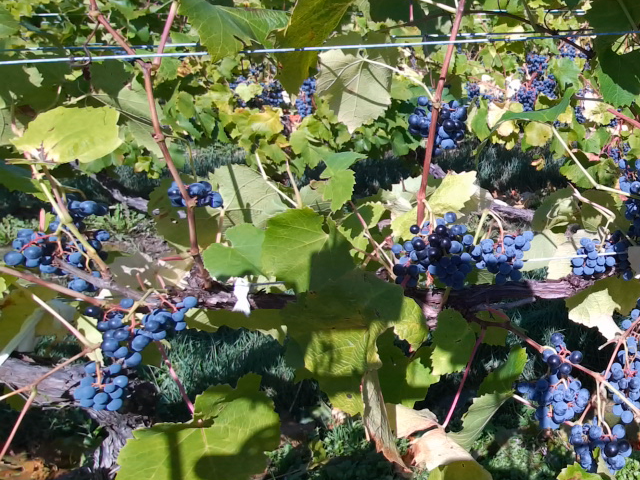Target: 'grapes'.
Masks as SVG:
<instances>
[{
  "instance_id": "18",
  "label": "grapes",
  "mask_w": 640,
  "mask_h": 480,
  "mask_svg": "<svg viewBox=\"0 0 640 480\" xmlns=\"http://www.w3.org/2000/svg\"><path fill=\"white\" fill-rule=\"evenodd\" d=\"M63 259L66 263H70L78 267L83 266V263L81 262L82 253L80 251H72L68 255H64Z\"/></svg>"
},
{
  "instance_id": "3",
  "label": "grapes",
  "mask_w": 640,
  "mask_h": 480,
  "mask_svg": "<svg viewBox=\"0 0 640 480\" xmlns=\"http://www.w3.org/2000/svg\"><path fill=\"white\" fill-rule=\"evenodd\" d=\"M542 361L551 367L550 374L534 384L519 383L517 391L527 393L529 400L542 404L534 414L539 427L557 431L564 422L572 421L575 414H580L587 408L591 394L586 387L581 388L582 381L578 378H572L567 388L563 383H559L557 388L552 387L563 375L568 376L572 367L562 363L553 353L543 352Z\"/></svg>"
},
{
  "instance_id": "9",
  "label": "grapes",
  "mask_w": 640,
  "mask_h": 480,
  "mask_svg": "<svg viewBox=\"0 0 640 480\" xmlns=\"http://www.w3.org/2000/svg\"><path fill=\"white\" fill-rule=\"evenodd\" d=\"M579 244L582 246L577 250V253H586V258L571 259L573 266V273L579 275H591L593 272H603L607 267L617 266H629V257L625 254H617L608 257H599L596 247L600 245L599 240L582 237L579 239Z\"/></svg>"
},
{
  "instance_id": "14",
  "label": "grapes",
  "mask_w": 640,
  "mask_h": 480,
  "mask_svg": "<svg viewBox=\"0 0 640 480\" xmlns=\"http://www.w3.org/2000/svg\"><path fill=\"white\" fill-rule=\"evenodd\" d=\"M627 210L625 211V218L628 221H633V235L640 237V201L638 199H630L625 202Z\"/></svg>"
},
{
  "instance_id": "4",
  "label": "grapes",
  "mask_w": 640,
  "mask_h": 480,
  "mask_svg": "<svg viewBox=\"0 0 640 480\" xmlns=\"http://www.w3.org/2000/svg\"><path fill=\"white\" fill-rule=\"evenodd\" d=\"M612 401L616 403L612 407V414L621 417L623 424H614L611 435L615 437L612 441L609 437L602 438L603 428L598 426L597 418L591 419V425L584 423L582 426L575 424L570 429L568 443L574 446V453L580 456V466L587 473L597 471V463L594 460L592 451L600 447L601 458L606 462L608 470L615 474L626 466V459L633 454V445L623 439L626 436V426H631L634 421L633 409L616 393L611 395Z\"/></svg>"
},
{
  "instance_id": "8",
  "label": "grapes",
  "mask_w": 640,
  "mask_h": 480,
  "mask_svg": "<svg viewBox=\"0 0 640 480\" xmlns=\"http://www.w3.org/2000/svg\"><path fill=\"white\" fill-rule=\"evenodd\" d=\"M441 122L437 123L434 145L441 146L446 150L457 149L455 143L461 141L465 135V126L462 121L467 119L465 107H460V102L451 100L449 103L441 104Z\"/></svg>"
},
{
  "instance_id": "12",
  "label": "grapes",
  "mask_w": 640,
  "mask_h": 480,
  "mask_svg": "<svg viewBox=\"0 0 640 480\" xmlns=\"http://www.w3.org/2000/svg\"><path fill=\"white\" fill-rule=\"evenodd\" d=\"M191 197H197V206L202 208L209 205L212 209H219L223 206V196L212 191V185L206 180H200L188 184Z\"/></svg>"
},
{
  "instance_id": "5",
  "label": "grapes",
  "mask_w": 640,
  "mask_h": 480,
  "mask_svg": "<svg viewBox=\"0 0 640 480\" xmlns=\"http://www.w3.org/2000/svg\"><path fill=\"white\" fill-rule=\"evenodd\" d=\"M96 367V362H88L84 366L86 377L80 380L78 387L70 390L71 396L84 410L92 408L93 411L105 410L106 413L120 410L123 407V400L120 397L123 395V388L129 384V378L125 375L103 378L101 383L105 387L102 388L103 392L97 393L99 388L92 387V384L98 382V378L92 375L97 373Z\"/></svg>"
},
{
  "instance_id": "7",
  "label": "grapes",
  "mask_w": 640,
  "mask_h": 480,
  "mask_svg": "<svg viewBox=\"0 0 640 480\" xmlns=\"http://www.w3.org/2000/svg\"><path fill=\"white\" fill-rule=\"evenodd\" d=\"M638 340L635 337L627 338L628 351L634 357V361L630 365L631 371H637L634 377H625L624 368L621 365L626 364V353L620 350L617 353L619 362L610 366L607 373L606 381L611 387L618 390L634 407L640 410V351H637Z\"/></svg>"
},
{
  "instance_id": "1",
  "label": "grapes",
  "mask_w": 640,
  "mask_h": 480,
  "mask_svg": "<svg viewBox=\"0 0 640 480\" xmlns=\"http://www.w3.org/2000/svg\"><path fill=\"white\" fill-rule=\"evenodd\" d=\"M455 221L454 212L445 213L443 217L435 219L437 226L431 233L430 221L423 223V229L417 224H412L409 232L412 235H429V244H426L422 237H412L406 240L403 246L398 243L390 246L394 255H400L402 251L407 252V255L401 256L398 264L393 266L397 284L408 274L410 277L407 286L416 287L419 273L424 274L427 270L432 276L439 275V281L447 287L460 291L467 274L472 270L469 261H476L477 270L488 268L491 274H497L496 283L499 285L507 282L509 275L514 281L522 279V258L524 252L531 249L530 242L534 239L531 231H525L517 237L505 235L502 238L503 247L498 245L494 251L495 243L491 238L482 239L476 246L471 247L474 236L464 235L467 232L465 224L453 225L451 229L445 226Z\"/></svg>"
},
{
  "instance_id": "13",
  "label": "grapes",
  "mask_w": 640,
  "mask_h": 480,
  "mask_svg": "<svg viewBox=\"0 0 640 480\" xmlns=\"http://www.w3.org/2000/svg\"><path fill=\"white\" fill-rule=\"evenodd\" d=\"M637 173V181L627 180L628 174L624 173L619 177V188L623 193L628 195H640V159H637L634 163Z\"/></svg>"
},
{
  "instance_id": "6",
  "label": "grapes",
  "mask_w": 640,
  "mask_h": 480,
  "mask_svg": "<svg viewBox=\"0 0 640 480\" xmlns=\"http://www.w3.org/2000/svg\"><path fill=\"white\" fill-rule=\"evenodd\" d=\"M46 233L33 229H19L17 238L11 243L14 250L20 251L32 241H36V237H45ZM10 251L4 255V264L11 267H19L24 265L28 268L37 267V271L42 275H48L57 271L56 267L51 266L52 256L43 255V248L40 246L25 247L22 253Z\"/></svg>"
},
{
  "instance_id": "2",
  "label": "grapes",
  "mask_w": 640,
  "mask_h": 480,
  "mask_svg": "<svg viewBox=\"0 0 640 480\" xmlns=\"http://www.w3.org/2000/svg\"><path fill=\"white\" fill-rule=\"evenodd\" d=\"M198 306L195 298H185L175 304L179 311L171 313L165 308L153 309L151 313L141 317V323L145 329L135 328L132 334L129 325H123L122 311H110L107 314L108 321H103L104 311L97 306L87 307L85 315L97 319V329L103 333L101 351L107 358L115 357L117 360L124 359V365L130 368L138 367L142 361V352L152 342H162L167 337V331L182 332L187 328L184 320L188 309Z\"/></svg>"
},
{
  "instance_id": "17",
  "label": "grapes",
  "mask_w": 640,
  "mask_h": 480,
  "mask_svg": "<svg viewBox=\"0 0 640 480\" xmlns=\"http://www.w3.org/2000/svg\"><path fill=\"white\" fill-rule=\"evenodd\" d=\"M110 239V233L106 229H98L95 233V238L89 241V244L95 251L102 249L101 241H108Z\"/></svg>"
},
{
  "instance_id": "19",
  "label": "grapes",
  "mask_w": 640,
  "mask_h": 480,
  "mask_svg": "<svg viewBox=\"0 0 640 480\" xmlns=\"http://www.w3.org/2000/svg\"><path fill=\"white\" fill-rule=\"evenodd\" d=\"M627 244L623 241H618L615 245H611L610 242H606L603 246V249L606 251H618V250H626Z\"/></svg>"
},
{
  "instance_id": "11",
  "label": "grapes",
  "mask_w": 640,
  "mask_h": 480,
  "mask_svg": "<svg viewBox=\"0 0 640 480\" xmlns=\"http://www.w3.org/2000/svg\"><path fill=\"white\" fill-rule=\"evenodd\" d=\"M416 103L422 107H416L413 114L408 117L409 132L412 135H420L427 138L428 127L432 116V101L426 95L420 94Z\"/></svg>"
},
{
  "instance_id": "10",
  "label": "grapes",
  "mask_w": 640,
  "mask_h": 480,
  "mask_svg": "<svg viewBox=\"0 0 640 480\" xmlns=\"http://www.w3.org/2000/svg\"><path fill=\"white\" fill-rule=\"evenodd\" d=\"M67 210L72 216V222L83 231L86 225L82 222L87 215L104 216L109 212V207L104 202L97 203L93 200H67Z\"/></svg>"
},
{
  "instance_id": "16",
  "label": "grapes",
  "mask_w": 640,
  "mask_h": 480,
  "mask_svg": "<svg viewBox=\"0 0 640 480\" xmlns=\"http://www.w3.org/2000/svg\"><path fill=\"white\" fill-rule=\"evenodd\" d=\"M67 288L75 291L76 293H81L83 291L96 292L98 290L97 286L75 276H73L72 281L67 282Z\"/></svg>"
},
{
  "instance_id": "15",
  "label": "grapes",
  "mask_w": 640,
  "mask_h": 480,
  "mask_svg": "<svg viewBox=\"0 0 640 480\" xmlns=\"http://www.w3.org/2000/svg\"><path fill=\"white\" fill-rule=\"evenodd\" d=\"M167 198L172 207H186L187 203L182 196L181 190L175 180L171 181V187L167 188Z\"/></svg>"
}]
</instances>
